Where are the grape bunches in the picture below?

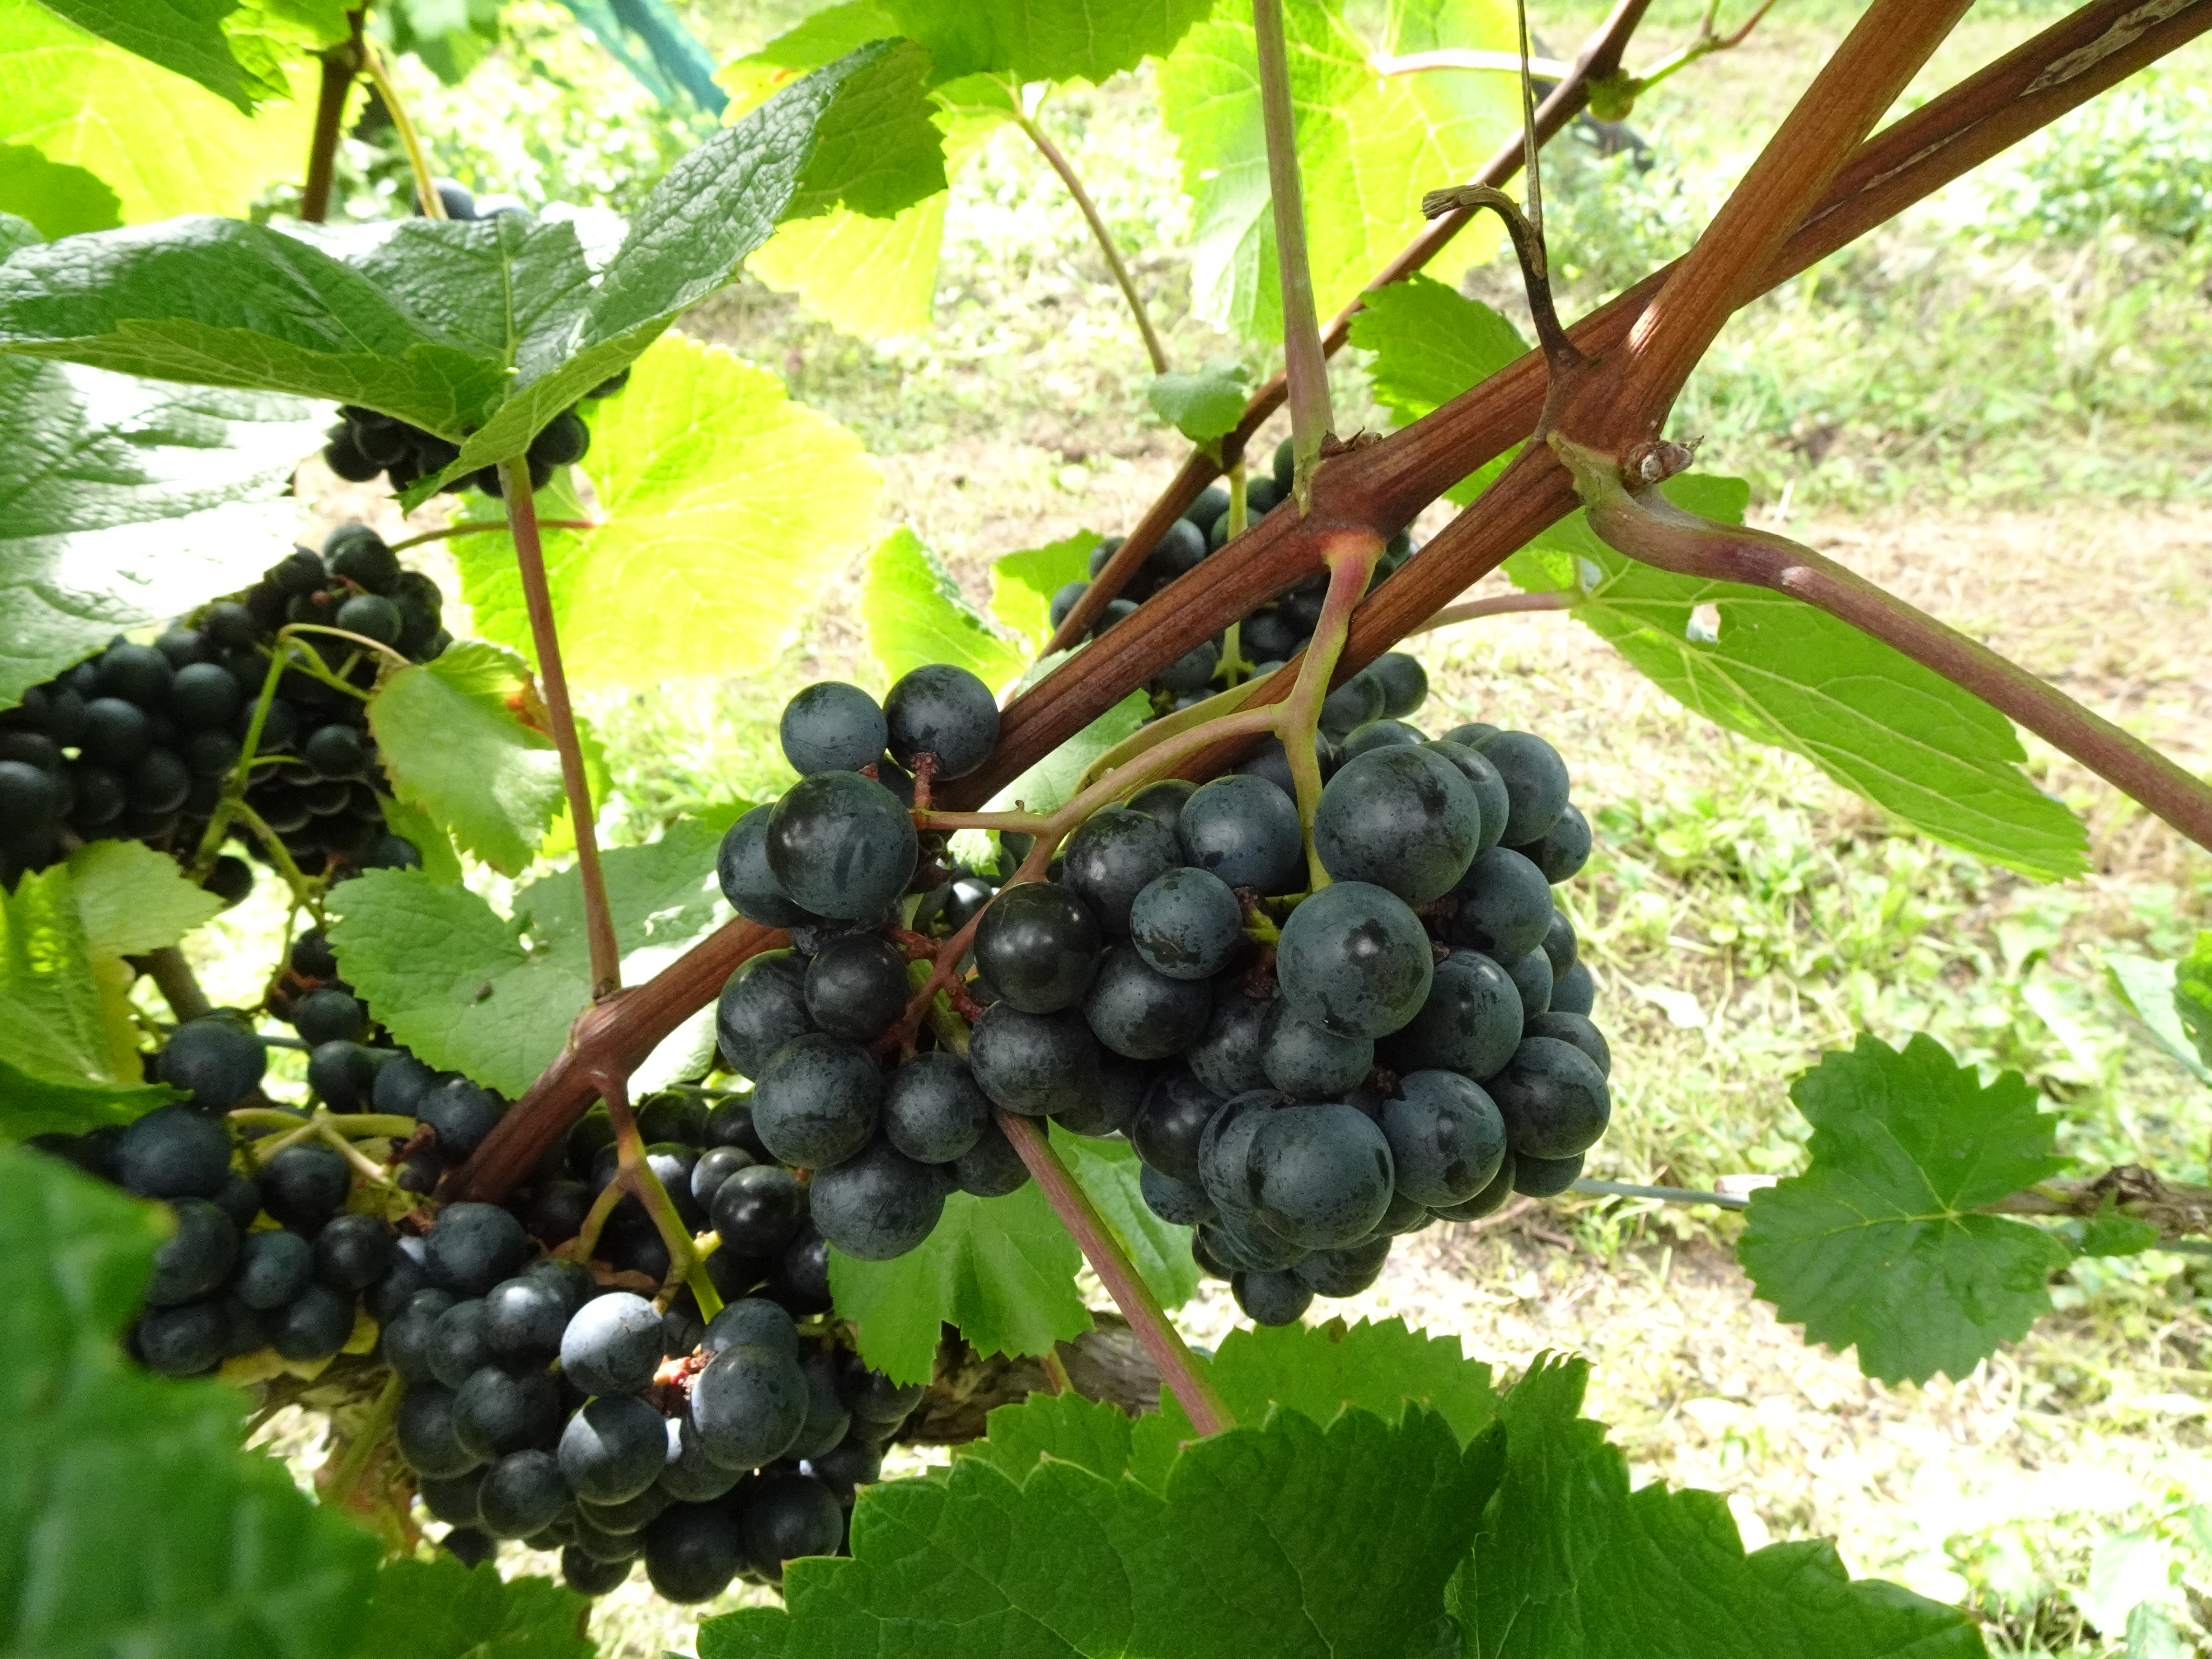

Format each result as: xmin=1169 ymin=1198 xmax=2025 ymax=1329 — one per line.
xmin=412 ymin=175 xmax=516 ymax=223
xmin=1050 ymin=438 xmax=1415 ymax=701
xmin=265 ymin=927 xmax=371 ymax=1023
xmin=211 ymin=522 xmax=453 ymax=887
xmin=0 ymin=598 xmax=295 ymax=907
xmin=715 ymin=664 xmax=1095 ymax=1261
xmin=64 ymin=987 xmax=503 ymax=1377
xmin=644 ymin=1419 xmax=899 ymax=1604
xmin=1055 ymin=654 xmax=1613 ymax=1328
xmin=383 ymin=1084 xmax=929 ymax=1596
xmin=322 ymin=367 xmax=631 ymax=497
